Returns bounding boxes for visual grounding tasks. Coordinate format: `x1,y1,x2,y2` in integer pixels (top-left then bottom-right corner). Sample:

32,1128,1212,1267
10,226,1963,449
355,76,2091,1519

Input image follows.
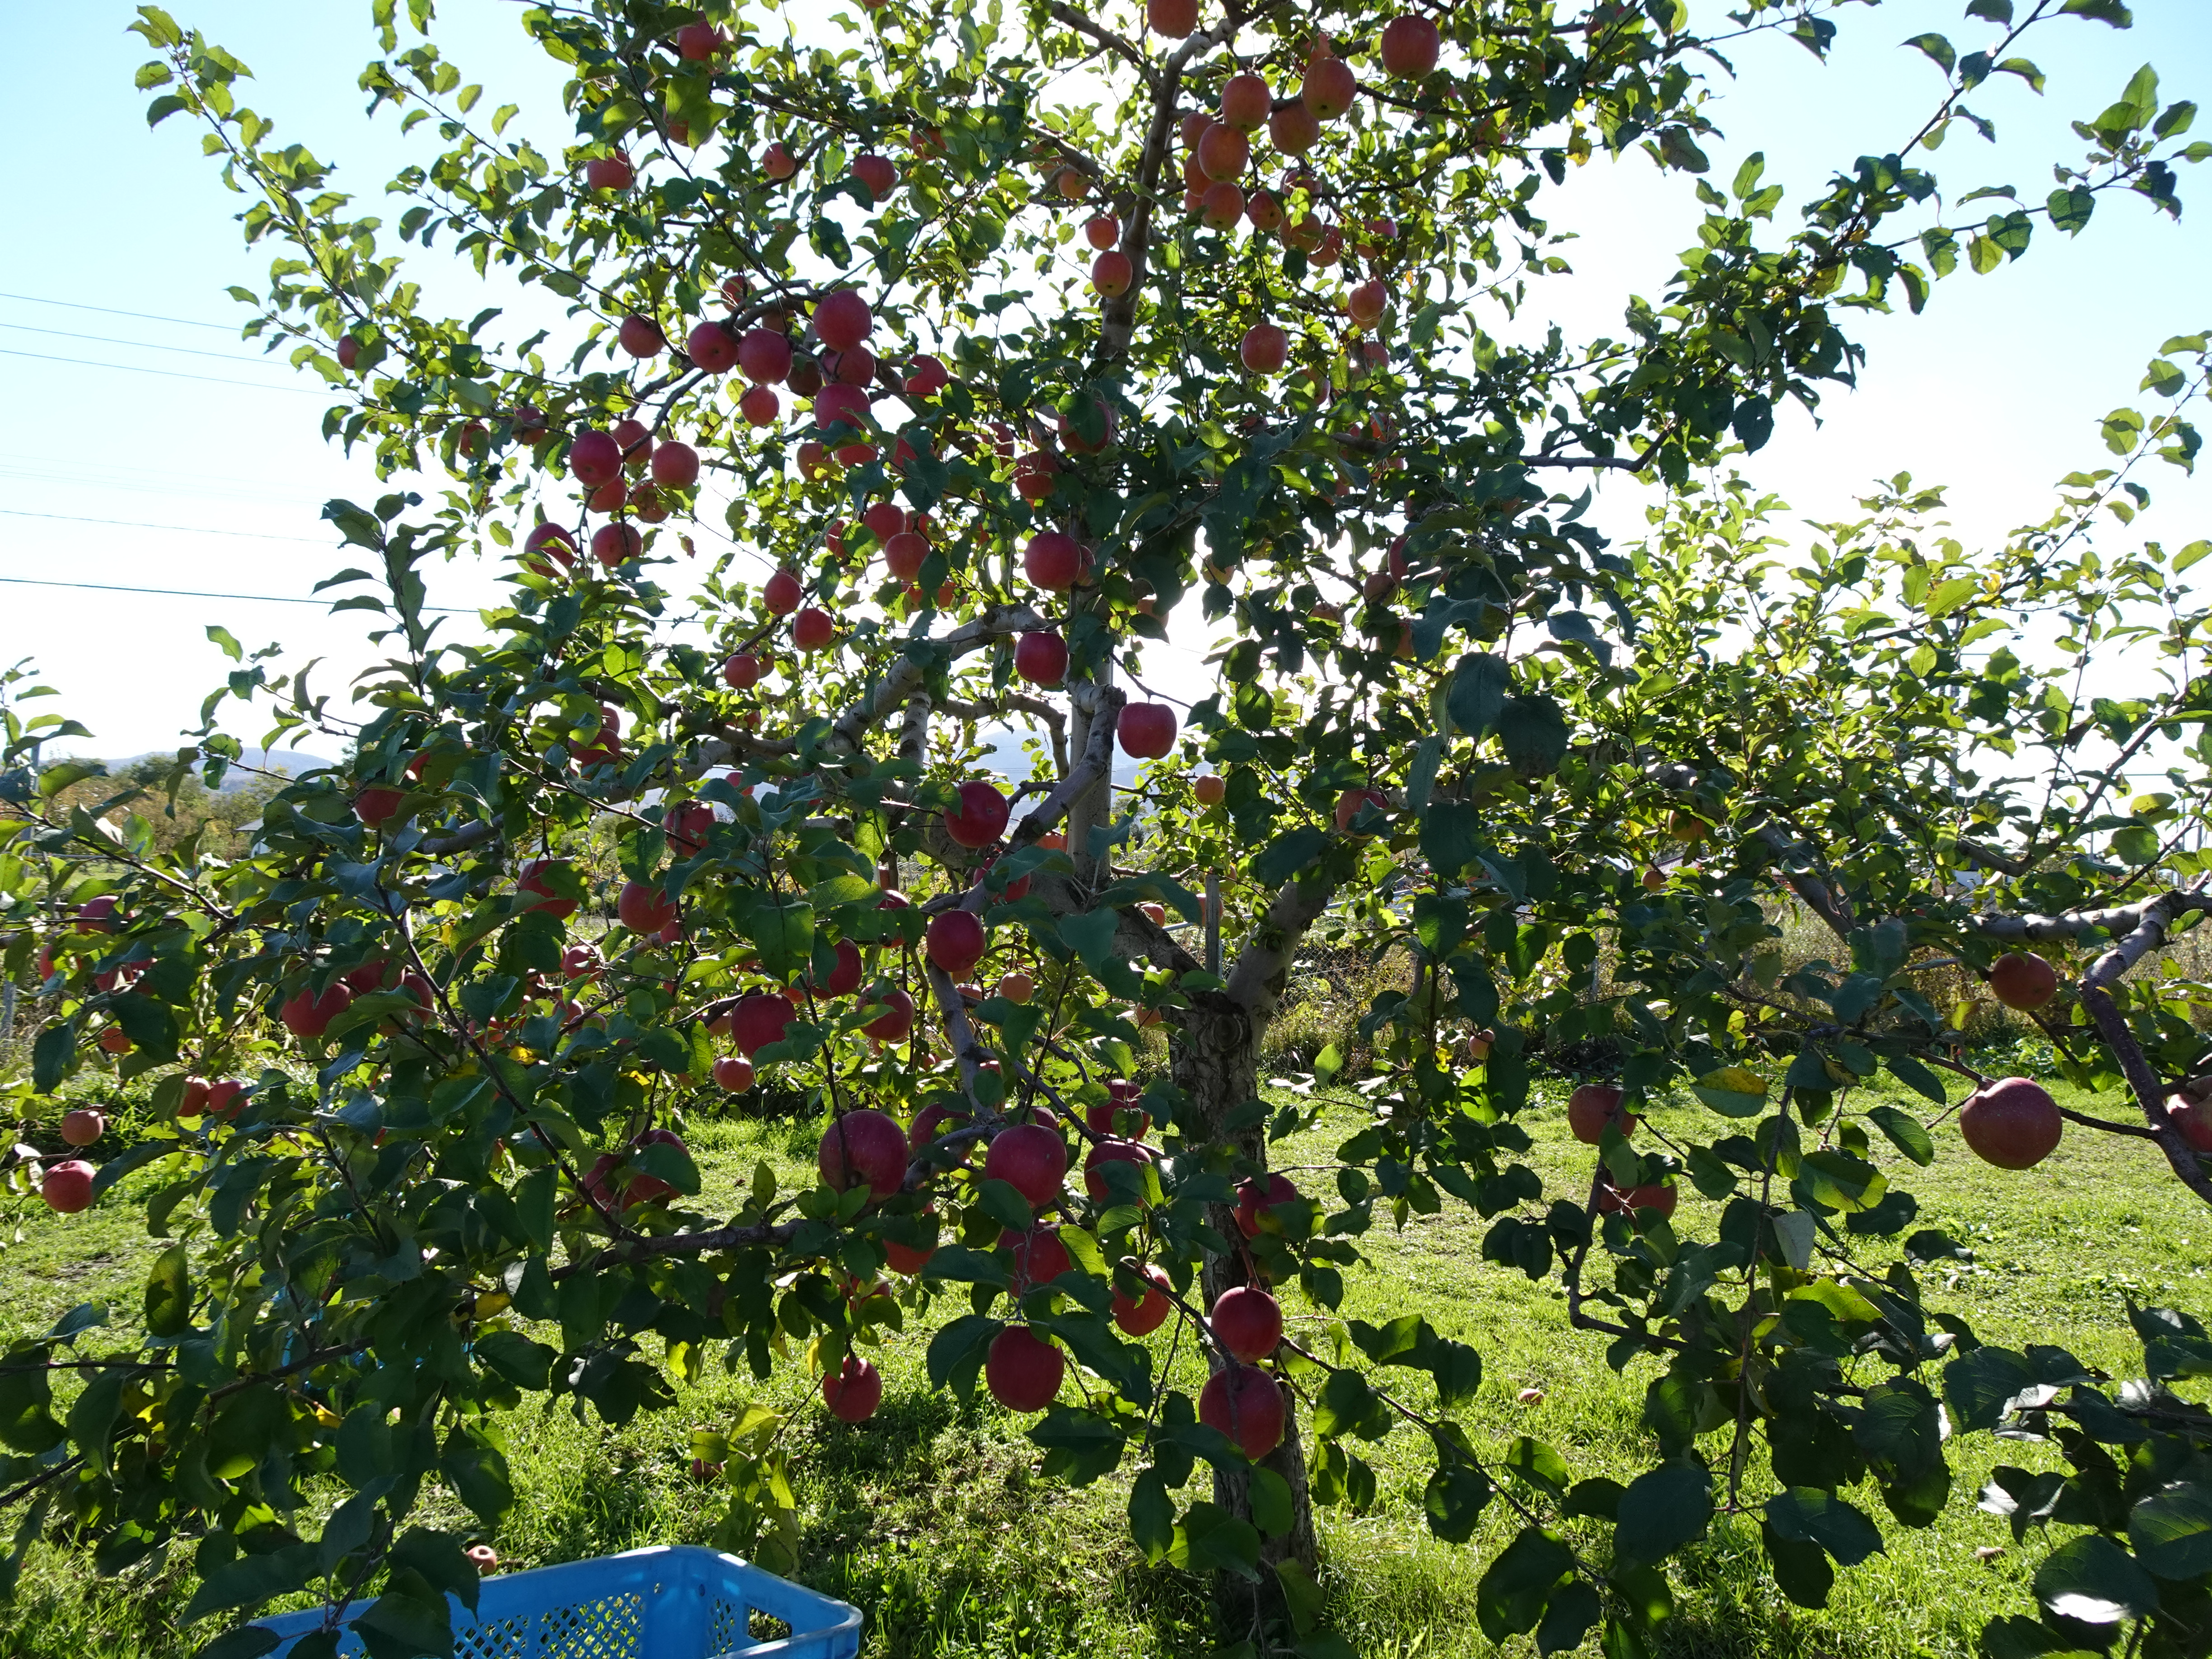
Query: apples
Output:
1669,802,1716,841
691,1423,716,1443
619,315,667,360
165,1075,212,1114
1143,0,1202,42
1033,832,1064,861
579,706,622,741
654,439,701,491
1247,187,1286,231
660,90,716,149
1349,213,1397,261
888,1178,941,1216
873,864,894,889
1640,866,1676,893
1416,90,1451,128
814,288,874,351
394,739,457,795
1221,74,1272,134
774,219,794,239
1463,864,1494,896
1029,414,1061,451
208,1081,251,1122
929,1044,959,1074
1007,954,1036,978
722,763,755,801
2166,1072,2212,1158
280,976,353,1039
703,1002,739,1036
862,501,906,548
1083,1141,1152,1210
1231,1168,1303,1243
1377,618,1428,663
805,934,864,998
590,522,644,569
1015,629,1069,685
910,118,955,160
659,974,685,1000
722,275,759,314
567,1011,609,1046
785,354,825,396
1238,410,1270,442
548,996,588,1034
937,949,976,983
60,1108,105,1147
1118,701,1177,757
993,1218,1079,1303
1363,570,1398,612
1951,1045,1963,1057
613,1128,694,1206
1524,45,1562,80
562,943,606,987
663,800,726,861
1199,1366,1285,1462
363,1078,385,1095
524,522,580,579
1199,120,1250,185
100,1022,133,1056
1338,781,1388,839
355,1103,395,1147
1403,491,1447,525
380,1071,400,1091
1277,530,1306,563
1031,139,1062,170
760,308,798,342
837,431,880,469
76,897,134,949
1287,367,1329,407
997,972,1034,1006
983,1123,1068,1209
497,992,535,1027
1013,452,1065,501
1108,1263,1174,1338
1322,420,1364,465
1061,828,1088,855
739,386,780,428
1469,1027,1501,1059
1362,409,1401,453
941,779,1010,850
954,980,985,1014
516,969,549,999
1302,224,1344,266
899,510,940,547
931,579,972,614
895,579,932,614
724,653,760,691
1908,905,1937,931
1278,212,1322,258
1306,603,1348,644
42,1159,101,1215
1212,1287,1285,1362
677,10,735,75
1499,691,1567,775
777,961,814,1003
910,1099,979,1174
815,383,871,442
17,1113,42,1140
899,351,950,402
943,1013,976,1043
1187,892,1225,925
589,734,624,768
1465,920,1484,940
1085,213,1120,251
1617,47,1634,63
763,141,797,179
1346,278,1387,321
825,519,863,561
630,481,676,524
37,945,94,988
707,1278,741,1319
724,701,763,737
1289,28,1343,76
837,1268,893,1328
1242,533,1270,562
938,466,974,500
1203,451,1237,484
663,1106,682,1124
737,326,792,384
1372,449,1405,483
586,148,640,199
1302,56,1356,121
1196,773,1226,806
1595,1156,1678,1229
979,422,1014,459
972,860,1032,908
516,857,584,922
611,421,659,464
1345,299,1387,333
1380,13,1440,81
1086,1078,1154,1148
1061,543,1096,587
346,939,406,994
730,994,801,1066
782,770,824,810
490,1140,521,1170
92,956,119,995
1480,481,1521,523
889,430,937,473
817,1106,908,1207
1136,991,1181,1030
1313,475,1352,515
885,531,934,584
1585,3,1645,48
974,1058,1010,1092
1092,250,1133,298
1016,1107,1059,1144
1421,863,1434,876
822,346,879,393
468,1014,506,1046
1991,951,2058,1011
488,179,511,201
1961,1076,2064,1171
822,1356,882,1424
518,1121,552,1148
617,876,678,934
1241,323,1289,375
1181,111,1220,153
1184,149,1231,198
1355,340,1390,377
1201,182,1245,232
120,954,167,997
792,607,834,653
1183,180,1220,224
583,474,628,514
712,1055,757,1093
906,1048,938,1078
1385,531,1455,593
1060,163,1094,200
1095,1391,1117,1413
508,406,550,447
375,970,435,1039
727,941,762,975
973,519,1006,548
737,638,777,679
463,1083,517,1129
579,1147,627,1209
466,1544,498,1576
852,888,916,949
872,1027,918,1064
1204,862,1239,894
677,1054,710,1089
1059,398,1112,454
337,333,381,372
457,423,493,455
1466,114,1511,160
1424,77,1459,106
1128,598,1173,634
1134,900,1168,935
690,1451,727,1487
535,939,568,976
1270,96,1321,157
861,0,892,11
1025,530,1083,593
850,152,897,203
986,1322,1065,1414
1568,1084,1639,1148
854,983,914,1039
569,742,612,777
1281,170,1322,210
687,321,739,373
903,166,914,178
876,1201,943,1278
659,917,696,951
1330,367,1378,407
772,563,802,591
570,432,623,487
354,766,416,830
763,572,802,615
1201,549,1236,590
797,438,836,482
